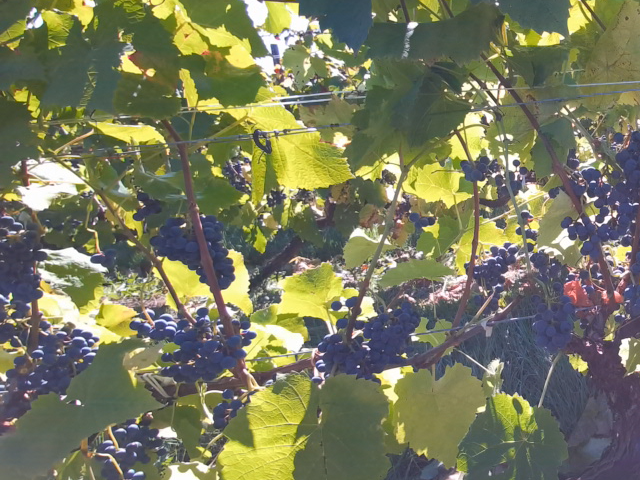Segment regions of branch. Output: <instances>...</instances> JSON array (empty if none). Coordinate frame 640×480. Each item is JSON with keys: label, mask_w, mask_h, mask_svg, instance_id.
Here are the masks:
<instances>
[{"label": "branch", "mask_w": 640, "mask_h": 480, "mask_svg": "<svg viewBox=\"0 0 640 480\" xmlns=\"http://www.w3.org/2000/svg\"><path fill=\"white\" fill-rule=\"evenodd\" d=\"M178 150H179L181 161H182V175H183L184 185L186 188V194H187L190 210H191L194 225H195L197 240L199 243L200 257L202 259V268L204 270L205 278L211 289V292L213 293L217 307L222 317L224 332L227 336H232L234 334L232 315L226 303L223 291L215 276L214 268L212 265L211 254L206 247L204 231L202 228V223H201L199 211L197 208V203H196L194 192H193V185L191 183L190 172H189V158L187 155L185 145L179 144Z\"/></svg>", "instance_id": "30e6481e"}, {"label": "branch", "mask_w": 640, "mask_h": 480, "mask_svg": "<svg viewBox=\"0 0 640 480\" xmlns=\"http://www.w3.org/2000/svg\"><path fill=\"white\" fill-rule=\"evenodd\" d=\"M441 142L440 138H435L425 149L421 150L420 152L415 153L406 163L405 167L403 168V170L400 172L397 181L395 183V189H394V193H393V197L388 209V214H387V219H386V223H385V227L383 228V231L381 233V236L379 237L376 247H375V251L373 253V256L371 257V262L369 264V267L367 268V272L364 274L363 279L360 283L359 289H358V293H357V297L355 299V302L353 304V308L351 310L349 319H348V323L346 325L345 331L343 332V340L346 343H351L353 341V335H352V331L353 328L355 326V322H356V318L357 315L360 311V306L363 302L364 296H365V292L367 290V287L369 286V282L370 279L372 277V273L374 271V267L376 262L378 261V256L380 254V250L382 247V244L384 243V240L388 234V231L390 229V225L392 222V216H393V212L396 206V202L398 200V196H399V191H400V186L402 183V180L404 179L405 175L407 174V172L410 170V167L412 166V164L415 162L416 159H418L419 157H422L423 155H426L427 153H429L435 145H437L438 143Z\"/></svg>", "instance_id": "325d2c04"}, {"label": "branch", "mask_w": 640, "mask_h": 480, "mask_svg": "<svg viewBox=\"0 0 640 480\" xmlns=\"http://www.w3.org/2000/svg\"><path fill=\"white\" fill-rule=\"evenodd\" d=\"M55 162L63 167L64 169H66V171L72 175L74 178H76L77 180H80L81 182H83L85 185H87L92 191L97 192V195L105 202V204L107 205L108 209L110 210L113 218L118 222V224L120 225V227L122 228L124 234L135 244V246L137 248H139L144 254H146L147 257H149L150 260L153 261V263H156V267L155 270L157 272H159L161 274L162 279L164 280L165 286L167 287L171 297L173 298V300L176 303V307L185 315L186 319L193 323L196 324L197 323V319L192 317L190 312L185 309L184 306H182L181 301L179 299V297L177 296V294L175 293L168 276L166 275V271L164 270V267L162 265V262L160 260H158L145 246H143L138 239L128 230L125 222L122 220V218L117 214L114 206L112 205L111 201L109 200V198L97 187L95 186L92 182H90L88 179H86L85 177H83L82 175H80L79 173H77L76 171H74L68 164H66L65 162H63L60 158H56Z\"/></svg>", "instance_id": "170604dd"}, {"label": "branch", "mask_w": 640, "mask_h": 480, "mask_svg": "<svg viewBox=\"0 0 640 480\" xmlns=\"http://www.w3.org/2000/svg\"><path fill=\"white\" fill-rule=\"evenodd\" d=\"M520 109L522 110V112L524 113L526 118L531 123V125H532L533 129L535 130L538 138L540 139L545 151L547 152V154L551 158V160L553 162V170L560 176V180L562 182V187L564 188L567 196L571 200L572 205L577 210V213L579 214V216L581 218H584L586 216V211L584 210V208L580 204L579 199L576 197V194L574 193L573 189L571 188V185L569 184V180L567 178V173L561 168V161L558 158V155L556 154V152L551 147V144L549 143L548 138L544 134V131L542 130L539 122L536 120L535 116L532 114L531 110L528 108L527 105L520 106Z\"/></svg>", "instance_id": "45aa463d"}, {"label": "branch", "mask_w": 640, "mask_h": 480, "mask_svg": "<svg viewBox=\"0 0 640 480\" xmlns=\"http://www.w3.org/2000/svg\"><path fill=\"white\" fill-rule=\"evenodd\" d=\"M473 209H474V239L472 241L473 252H472V257L470 259V264L468 265V276H467V282L465 283V287L463 290L462 301L452 321V324L454 326H457L460 324V320L468 306V303L470 300V293L472 289L473 268L475 266V262L477 260V255H478L479 244L477 243V240H479V206H478V184L477 183L473 184Z\"/></svg>", "instance_id": "982ccf7c"}, {"label": "branch", "mask_w": 640, "mask_h": 480, "mask_svg": "<svg viewBox=\"0 0 640 480\" xmlns=\"http://www.w3.org/2000/svg\"><path fill=\"white\" fill-rule=\"evenodd\" d=\"M482 331H483V328L481 326H476V327H473L472 329H470L469 331H467L466 333H464L463 335L455 337V338H454L455 332H450L449 337L445 341H442L441 343H438V344L434 345L431 349L425 351L424 353L415 355V356L407 359L405 361V364L407 366H411V365H413L415 363H418L420 361L426 360V359L432 357L433 355H435L432 359H430V360H428L426 362L417 364L416 368L417 369H423V368H426L428 366H431L434 363H436L439 358L442 357L443 353L447 350L448 347L461 344V343L465 342L466 340H469L470 338H472L474 335L481 333Z\"/></svg>", "instance_id": "1ff4a987"}, {"label": "branch", "mask_w": 640, "mask_h": 480, "mask_svg": "<svg viewBox=\"0 0 640 480\" xmlns=\"http://www.w3.org/2000/svg\"><path fill=\"white\" fill-rule=\"evenodd\" d=\"M505 184H506V188H507V192L510 196V201L512 206L515 209L516 215H517V219L519 222V226H520V230H521V236H522V250H523V257H524V261L526 263L527 269H528V274H529V282H530V286L534 287L535 286V281L532 280V277H534V271H533V266L531 263V260L529 258V254H528V248H527V234H526V227L524 224V220L522 217V212L520 210V207L516 201V198L513 194V189H512V185L510 182V175L506 174L505 175Z\"/></svg>", "instance_id": "ea751061"}, {"label": "branch", "mask_w": 640, "mask_h": 480, "mask_svg": "<svg viewBox=\"0 0 640 480\" xmlns=\"http://www.w3.org/2000/svg\"><path fill=\"white\" fill-rule=\"evenodd\" d=\"M31 313H32L31 332H30L29 346L24 353L25 357H28L31 354L32 350L38 347L37 338H38L39 329H38V301L37 300H34L32 302Z\"/></svg>", "instance_id": "ca6c30ca"}, {"label": "branch", "mask_w": 640, "mask_h": 480, "mask_svg": "<svg viewBox=\"0 0 640 480\" xmlns=\"http://www.w3.org/2000/svg\"><path fill=\"white\" fill-rule=\"evenodd\" d=\"M598 265L604 276L602 281L605 283V292L608 296H611L614 293V283L608 266L604 260H600Z\"/></svg>", "instance_id": "1d269e1b"}, {"label": "branch", "mask_w": 640, "mask_h": 480, "mask_svg": "<svg viewBox=\"0 0 640 480\" xmlns=\"http://www.w3.org/2000/svg\"><path fill=\"white\" fill-rule=\"evenodd\" d=\"M237 369H238L241 387L243 389H248L250 387V379L248 375L246 361L244 359H239L237 361Z\"/></svg>", "instance_id": "1af6ec82"}, {"label": "branch", "mask_w": 640, "mask_h": 480, "mask_svg": "<svg viewBox=\"0 0 640 480\" xmlns=\"http://www.w3.org/2000/svg\"><path fill=\"white\" fill-rule=\"evenodd\" d=\"M481 59L496 75L497 79L502 85H511V83L504 77L503 73L498 69V67L493 63L491 58L486 53H483L481 55Z\"/></svg>", "instance_id": "2b1400db"}, {"label": "branch", "mask_w": 640, "mask_h": 480, "mask_svg": "<svg viewBox=\"0 0 640 480\" xmlns=\"http://www.w3.org/2000/svg\"><path fill=\"white\" fill-rule=\"evenodd\" d=\"M524 297H525V294L523 292L518 293L512 299V301L507 305V307L504 310L498 312L497 314H494L491 317V320L501 319L506 317Z\"/></svg>", "instance_id": "8bde2521"}, {"label": "branch", "mask_w": 640, "mask_h": 480, "mask_svg": "<svg viewBox=\"0 0 640 480\" xmlns=\"http://www.w3.org/2000/svg\"><path fill=\"white\" fill-rule=\"evenodd\" d=\"M453 130H454V135H455L457 141L459 142L460 148L463 150L464 154L468 157V159L472 160L473 159V155L468 150V147L465 145L464 140L462 139V136H461V134L459 132V127L458 126H454Z\"/></svg>", "instance_id": "a944a4c4"}]
</instances>
